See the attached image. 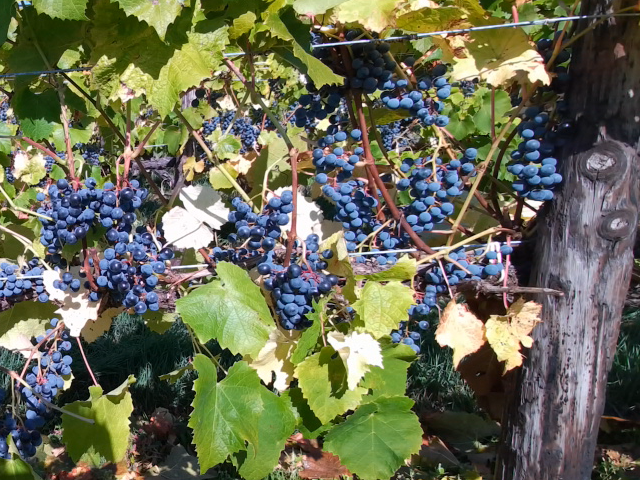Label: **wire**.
<instances>
[{"label":"wire","mask_w":640,"mask_h":480,"mask_svg":"<svg viewBox=\"0 0 640 480\" xmlns=\"http://www.w3.org/2000/svg\"><path fill=\"white\" fill-rule=\"evenodd\" d=\"M90 66H70V67H59L52 70H25L20 72H9L7 74H1V79H9L11 77H22L27 75H54L62 72H72V71H90Z\"/></svg>","instance_id":"a73af890"},{"label":"wire","mask_w":640,"mask_h":480,"mask_svg":"<svg viewBox=\"0 0 640 480\" xmlns=\"http://www.w3.org/2000/svg\"><path fill=\"white\" fill-rule=\"evenodd\" d=\"M640 17V12H631V13H618V14H610V13H594V14H578V15H560L548 19H537V20H524V21H514L508 23H497L491 25H477V26H465L460 28H453L444 31H435L430 30L421 33L415 34H391L387 36L380 37H371L367 39H349V40H336V41H328V42H318L314 43V48L320 47H331L338 45H351V44H369L373 42H382L389 41L393 39H417L428 36H447L455 33H462L467 31H479V30H493L499 28H510L517 26H526V25H539V24H550L562 20H580V19H596V18H608V19H621V18H633Z\"/></svg>","instance_id":"d2f4af69"},{"label":"wire","mask_w":640,"mask_h":480,"mask_svg":"<svg viewBox=\"0 0 640 480\" xmlns=\"http://www.w3.org/2000/svg\"><path fill=\"white\" fill-rule=\"evenodd\" d=\"M421 251H422L421 247L393 248V249L374 250V251H368V252H350L347 254V257L348 258L370 257V256L385 255V254H396V253H419Z\"/></svg>","instance_id":"4f2155b8"}]
</instances>
